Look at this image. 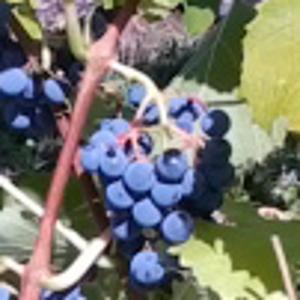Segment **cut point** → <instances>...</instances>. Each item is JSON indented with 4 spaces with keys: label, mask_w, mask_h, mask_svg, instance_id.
Instances as JSON below:
<instances>
[{
    "label": "cut point",
    "mask_w": 300,
    "mask_h": 300,
    "mask_svg": "<svg viewBox=\"0 0 300 300\" xmlns=\"http://www.w3.org/2000/svg\"><path fill=\"white\" fill-rule=\"evenodd\" d=\"M111 70L122 73L126 76L135 78L151 96L152 102L159 110V116H169L170 110L168 104L163 98V94L157 83L150 78L141 68L130 65L115 58V61L109 67Z\"/></svg>",
    "instance_id": "cut-point-1"
}]
</instances>
